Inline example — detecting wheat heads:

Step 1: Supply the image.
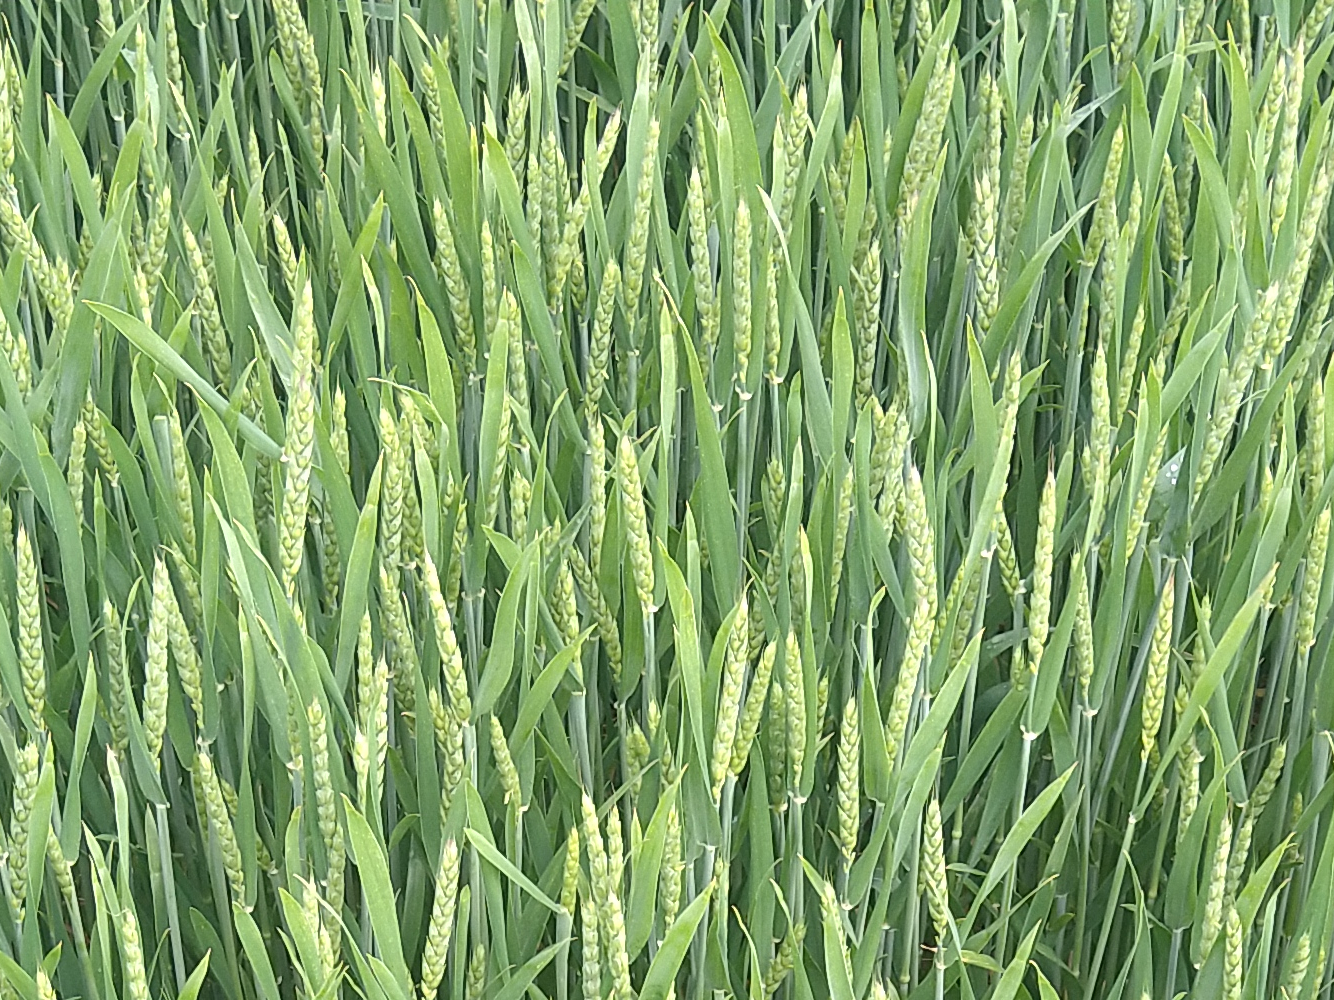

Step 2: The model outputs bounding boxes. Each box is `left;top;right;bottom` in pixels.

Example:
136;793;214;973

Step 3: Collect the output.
732;642;777;773
196;754;250;910
507;468;532;538
1192;594;1212;684
123;911;161;1000
1262;467;1272;529
872;395;886;441
358;608;382;776
1277;934;1312;1000
323;394;349;470
572;254;590;311
1291;0;1334;59
764;231;779;374
823;880;849;992
8;60;22;116
126;196;148;287
82;383;121;484
274;2;303;128
0;711;11;860
484;401;516;537
1241;0;1255;65
46;824;77;904
560;0;600;68
1275;131;1334;337
824;164;844;240
550;555;580;654
315;196;344;290
707;50;724;119
648;705;676;781
96;0;116;37
693;119;712;210
277;655;304;760
903;466;943;608
1162;151;1183;269
557;830;581;912
581;254;617;414
1101;209;1119;353
249;408;275;530
438;714;462;820
376;557;422;736
1259;67;1284;175
815;674;830;739
405;396;439;471
767;681;787;802
445;476;471;602
421;690;448;749
880;601;935;767
731;204;753;386
526;150;542;229
921;801;942;929
900;49;958;229
244;123;261;194
540;134;562;310
764;921;803;1000
633;724;654;770
829;468;854;601
368;70;384;144
588;417;603;577
308;88;326;178
419;60;452;180
1304;375;1325;495
374;655;393;798
1174;750;1199;854
778;86;809;235
0;501;12;559
504;91;526;203
309;700;336;848
619;720;637;793
852;243;882;391
480;220;501;361
1137;570;1175;742
1027;474;1058;665
566;543;621;683
285;0;323;106
0;965;24;1000
912;0;931;57
658;803;680;915
764;460;804;621
783;634;807;785
603;892;636;1000
1292;285;1333;393
1075;442;1092;496
747;541;785;657
426;558;472;718
434;204;482;389
0;196;54;304
161;0;192;126
1296;509;1334;653
996;350;1021;489
384;427;404;581
321;508;346;592
148;187;174;289
1121;426;1164;562
1120;179;1143;265
198;229;218;287
189;754;209;848
0;0;12;161
492;714;522;801
558;150;576;230
169;586;204;726
179;216;232;375
68;422;84;533
291;280;313;404
399;412;424;565
219;783;274;868
1172;682;1196;757
685;165;718;356
1142;284;1186;374
273;216;301;290
1178;88;1205;218
973;181;997;335
465;943;488;1000
1196;813;1231;955
618;437;655;611
146;556;168;754
281;390;313;577
1071;551;1092;682
1114;306;1147;418
584;794;606;899
617;116;661;309
169;540;204;605
562;106;621;275
171;415;194;560
137;146;164;198
16;524;49;720
423;840;458;1000
504;291;531;410
1076;294;1089;352
1270;48;1304;236
1091;349;1110;507
8;741;37;903
834;697;860;847
881;420;913;527
320;826;346;968
996;499;1022;589
0;287;26;399
640;0;658;93
1086;128;1128;244
1295;793;1306;874
1233;821;1253;886
98;600;138;750
931;549;986;662
1109;0;1127;60
854;204;879;272
965;78;1000;234
1189;293;1277;515
1181;1;1202;46
886;0;907;45
1050;0;1074;72
51;259;73;323
1002;113;1035;262
606;801;626;892
581;900;606;1000
858;407;899;507
1248;745;1286;828
713;594;747;795
83;172;101;260
1219;905;1242;1000
1235;183;1246;254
